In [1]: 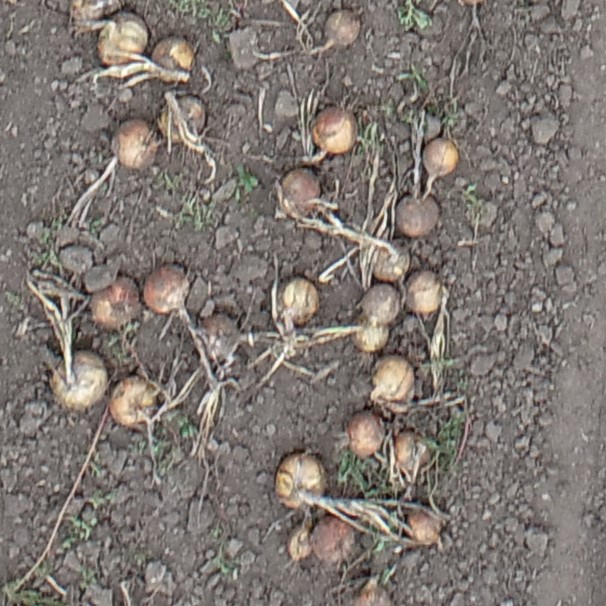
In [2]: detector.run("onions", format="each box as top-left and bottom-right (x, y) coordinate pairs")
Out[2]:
(273, 277), (319, 323)
(320, 10), (356, 47)
(403, 504), (442, 545)
(370, 356), (415, 401)
(357, 585), (394, 606)
(99, 14), (147, 62)
(278, 169), (318, 215)
(343, 413), (383, 456)
(114, 121), (160, 169)
(398, 433), (432, 472)
(419, 138), (460, 177)
(401, 272), (442, 313)
(273, 454), (323, 506)
(394, 195), (436, 237)
(370, 246), (407, 283)
(199, 315), (239, 354)
(356, 283), (401, 328)
(312, 108), (353, 151)
(160, 93), (204, 143)
(354, 318), (390, 353)
(45, 351), (108, 411)
(88, 279), (138, 327)
(73, 0), (120, 19)
(141, 266), (187, 312)
(111, 377), (160, 425)
(311, 515), (356, 562)
(285, 527), (312, 559)
(154, 34), (194, 73)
